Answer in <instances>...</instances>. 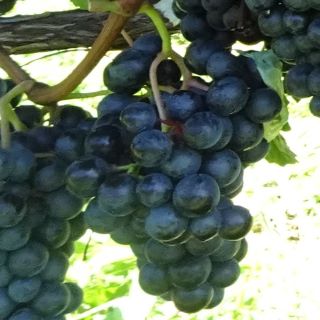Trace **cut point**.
<instances>
[{
  "label": "cut point",
  "instance_id": "obj_1",
  "mask_svg": "<svg viewBox=\"0 0 320 320\" xmlns=\"http://www.w3.org/2000/svg\"><path fill=\"white\" fill-rule=\"evenodd\" d=\"M138 14H146L149 16L153 23L155 24L156 28L158 29V32L162 38V47L163 49L158 54V56L155 58L153 63L150 67V74H149V81L150 86L152 88L154 101L156 103L157 109L159 111V117L161 121L167 120V114L165 112V108L159 93V85L156 78V68L161 63V61L165 59H171L176 61L182 68L183 74H184V82L182 86L180 87L179 91H188V88L190 85L195 86L200 89L208 90V87L204 84L198 83L192 79L191 72L189 68L186 66L183 58L179 55H177L170 46L169 37L167 33L166 26L164 24V21L162 20L161 16L158 14V12L152 8L151 4L148 1H144L143 5L137 12Z\"/></svg>",
  "mask_w": 320,
  "mask_h": 320
},
{
  "label": "cut point",
  "instance_id": "obj_2",
  "mask_svg": "<svg viewBox=\"0 0 320 320\" xmlns=\"http://www.w3.org/2000/svg\"><path fill=\"white\" fill-rule=\"evenodd\" d=\"M35 83V80H25L19 83L15 88L11 89L5 96L0 99V117L11 120L16 132L26 130L27 127L23 122L19 121L9 102L12 98L17 96L21 92L32 89Z\"/></svg>",
  "mask_w": 320,
  "mask_h": 320
}]
</instances>
